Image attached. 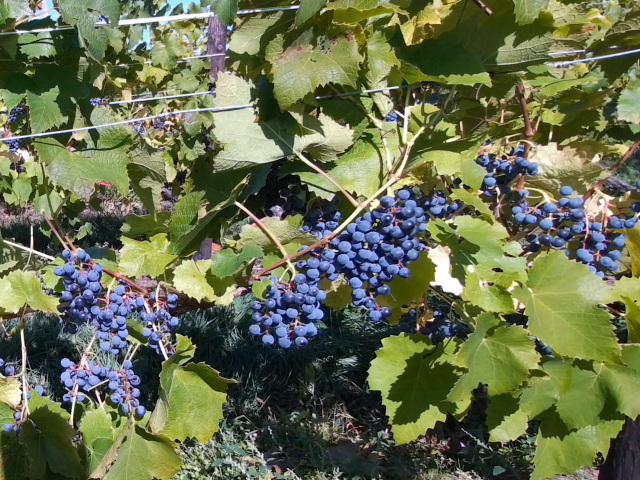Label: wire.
<instances>
[{"mask_svg": "<svg viewBox=\"0 0 640 480\" xmlns=\"http://www.w3.org/2000/svg\"><path fill=\"white\" fill-rule=\"evenodd\" d=\"M632 54H640V49H630V50H625V51H613L610 53H607L605 55H596V56H591V57H587L584 59H578V60H572V61H564V62H550L547 61L546 65L548 67H567V66H574V65H581V64H586L589 62H593V61H598V60H607L616 56H627V55H632Z\"/></svg>", "mask_w": 640, "mask_h": 480, "instance_id": "4", "label": "wire"}, {"mask_svg": "<svg viewBox=\"0 0 640 480\" xmlns=\"http://www.w3.org/2000/svg\"><path fill=\"white\" fill-rule=\"evenodd\" d=\"M214 13L212 11L206 12H194L188 14L177 15H151L145 17H131L124 18L119 21L121 26L134 25V24H147L154 22H179V21H191L196 19L212 18Z\"/></svg>", "mask_w": 640, "mask_h": 480, "instance_id": "2", "label": "wire"}, {"mask_svg": "<svg viewBox=\"0 0 640 480\" xmlns=\"http://www.w3.org/2000/svg\"><path fill=\"white\" fill-rule=\"evenodd\" d=\"M300 9V5L298 3H293L289 5H266V6H254L249 8H239L236 11L238 16L242 15H252L256 13H268V12H291L298 11Z\"/></svg>", "mask_w": 640, "mask_h": 480, "instance_id": "5", "label": "wire"}, {"mask_svg": "<svg viewBox=\"0 0 640 480\" xmlns=\"http://www.w3.org/2000/svg\"><path fill=\"white\" fill-rule=\"evenodd\" d=\"M406 85L405 84H399L393 87H370V88H359V89H353V90H348V91H343L340 93L341 97H345V96H350V95H356V94H362V93H372V92H395V91H399L401 89H405Z\"/></svg>", "mask_w": 640, "mask_h": 480, "instance_id": "7", "label": "wire"}, {"mask_svg": "<svg viewBox=\"0 0 640 480\" xmlns=\"http://www.w3.org/2000/svg\"><path fill=\"white\" fill-rule=\"evenodd\" d=\"M255 107H256L255 103H248V104H235V105H230V106H214V107H210V108L195 107V108H186V109H178V110H171V111H163V112L152 113L150 115L137 116V117H131V118H125V119H119V120H113V121L106 122V123H98V124L87 125V126H79V127H73V128L56 130V131H48V132H40V133H28V134H24V135H9V136H6V137H0V142H9V141H12V140H27V139H30V138H43V137L58 136V135L75 133V132L95 130V129H99V128H109V127H113L115 125H121V124L133 123V122H140V121H147V120H152V119L159 118V117H166V116H173V115L198 113V112L199 113H212V112H217V111H232V110H237V109H251V108H255Z\"/></svg>", "mask_w": 640, "mask_h": 480, "instance_id": "1", "label": "wire"}, {"mask_svg": "<svg viewBox=\"0 0 640 480\" xmlns=\"http://www.w3.org/2000/svg\"><path fill=\"white\" fill-rule=\"evenodd\" d=\"M214 93H215L214 89H210V90H193V91H187V92H182V93L165 94V95H161V96H158V97H155V98L124 99V100H119V101H109L108 105L109 106H121V105H126V104L157 103V102H161V101L167 100V99L184 98V97H190V96H195V95H213Z\"/></svg>", "mask_w": 640, "mask_h": 480, "instance_id": "3", "label": "wire"}, {"mask_svg": "<svg viewBox=\"0 0 640 480\" xmlns=\"http://www.w3.org/2000/svg\"><path fill=\"white\" fill-rule=\"evenodd\" d=\"M584 52H585L584 48L575 49V50L551 51L547 53V56L553 57V56H565V55H578V54H583Z\"/></svg>", "mask_w": 640, "mask_h": 480, "instance_id": "8", "label": "wire"}, {"mask_svg": "<svg viewBox=\"0 0 640 480\" xmlns=\"http://www.w3.org/2000/svg\"><path fill=\"white\" fill-rule=\"evenodd\" d=\"M71 30L72 26L69 24H63L61 26H45L40 28H25V29H17V30H2L0 31V36L4 35H19V34H27V33H42L47 31H63V30Z\"/></svg>", "mask_w": 640, "mask_h": 480, "instance_id": "6", "label": "wire"}]
</instances>
